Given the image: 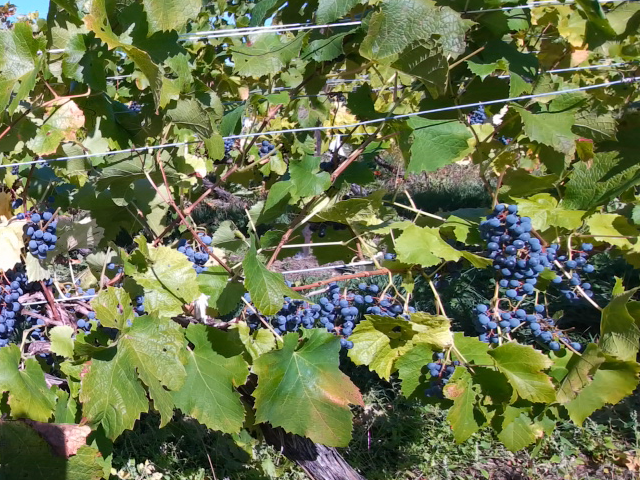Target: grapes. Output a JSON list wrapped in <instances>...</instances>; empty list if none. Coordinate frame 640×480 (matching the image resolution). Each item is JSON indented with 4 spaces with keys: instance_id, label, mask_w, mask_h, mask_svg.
Here are the masks:
<instances>
[{
    "instance_id": "16",
    "label": "grapes",
    "mask_w": 640,
    "mask_h": 480,
    "mask_svg": "<svg viewBox=\"0 0 640 480\" xmlns=\"http://www.w3.org/2000/svg\"><path fill=\"white\" fill-rule=\"evenodd\" d=\"M246 312L248 313V316H249L250 328L251 329L257 328L258 324L260 323V319L257 318V316L254 314V312L250 308H247Z\"/></svg>"
},
{
    "instance_id": "12",
    "label": "grapes",
    "mask_w": 640,
    "mask_h": 480,
    "mask_svg": "<svg viewBox=\"0 0 640 480\" xmlns=\"http://www.w3.org/2000/svg\"><path fill=\"white\" fill-rule=\"evenodd\" d=\"M54 214V209L53 208H48L44 213H42L41 215L38 212H34L32 213L31 210H28L27 215L30 217V220L33 223H39L41 219H43L44 222H48L51 217Z\"/></svg>"
},
{
    "instance_id": "18",
    "label": "grapes",
    "mask_w": 640,
    "mask_h": 480,
    "mask_svg": "<svg viewBox=\"0 0 640 480\" xmlns=\"http://www.w3.org/2000/svg\"><path fill=\"white\" fill-rule=\"evenodd\" d=\"M32 337H37L38 340H40L42 342H47L48 341V337H46L45 335L41 334V328H35V331H32Z\"/></svg>"
},
{
    "instance_id": "17",
    "label": "grapes",
    "mask_w": 640,
    "mask_h": 480,
    "mask_svg": "<svg viewBox=\"0 0 640 480\" xmlns=\"http://www.w3.org/2000/svg\"><path fill=\"white\" fill-rule=\"evenodd\" d=\"M38 358L47 359V361H46L47 365H53L54 364V357H52V354H50V353L39 352Z\"/></svg>"
},
{
    "instance_id": "4",
    "label": "grapes",
    "mask_w": 640,
    "mask_h": 480,
    "mask_svg": "<svg viewBox=\"0 0 640 480\" xmlns=\"http://www.w3.org/2000/svg\"><path fill=\"white\" fill-rule=\"evenodd\" d=\"M8 276L12 281L11 285L5 284L4 291L3 287L0 286V303L5 301V305L0 307V347H5L9 342L7 335L14 331L13 326L17 323L15 313L22 309L21 302H17L19 297L24 295V290L20 287V283L29 284V278L20 265L15 266V271L9 269Z\"/></svg>"
},
{
    "instance_id": "9",
    "label": "grapes",
    "mask_w": 640,
    "mask_h": 480,
    "mask_svg": "<svg viewBox=\"0 0 640 480\" xmlns=\"http://www.w3.org/2000/svg\"><path fill=\"white\" fill-rule=\"evenodd\" d=\"M358 289L360 291H366L368 290L371 294H360V295H356L355 293H349L347 295L348 299L354 298V302L356 304H360V305H364L365 303L371 304L375 302V299L373 298L372 294H376L379 292L380 290V286L378 284H370L367 285L366 283H360L358 285Z\"/></svg>"
},
{
    "instance_id": "1",
    "label": "grapes",
    "mask_w": 640,
    "mask_h": 480,
    "mask_svg": "<svg viewBox=\"0 0 640 480\" xmlns=\"http://www.w3.org/2000/svg\"><path fill=\"white\" fill-rule=\"evenodd\" d=\"M505 206L498 204L495 206L493 214L487 216V220L479 224L482 230L480 237L487 239V257L495 259L493 269L500 271L504 277L499 281L501 288L519 287L521 281L526 277L522 286V292L527 295L534 294V286L538 282L539 275L544 268L553 269L554 261L565 262V255H558L560 249L559 244L548 246L545 251L544 246L540 244V240L531 237L530 230L533 229L530 217L518 216L519 207L510 204L507 207V213L504 217L506 229L513 232L512 245H507L505 249L500 242H506L511 239L509 234H505V228L501 224V216Z\"/></svg>"
},
{
    "instance_id": "14",
    "label": "grapes",
    "mask_w": 640,
    "mask_h": 480,
    "mask_svg": "<svg viewBox=\"0 0 640 480\" xmlns=\"http://www.w3.org/2000/svg\"><path fill=\"white\" fill-rule=\"evenodd\" d=\"M273 149H274V145L270 144L267 140H264L262 142V147L258 151V156L264 157L265 155L269 154L270 151H272Z\"/></svg>"
},
{
    "instance_id": "2",
    "label": "grapes",
    "mask_w": 640,
    "mask_h": 480,
    "mask_svg": "<svg viewBox=\"0 0 640 480\" xmlns=\"http://www.w3.org/2000/svg\"><path fill=\"white\" fill-rule=\"evenodd\" d=\"M328 292L330 293V301L327 297H321L319 303H313L309 306L306 299L292 300L290 295L284 297L286 303L282 305L276 318L271 320V324L275 327L274 331L281 335L283 331H299L301 329V323L307 330H311L319 319L320 323L326 327L328 331H333L336 328L334 320L337 315L334 313L336 306L341 308V315L343 321L340 324L339 334L341 336L351 335L355 328L354 316L359 314V309L354 305H349V301L346 298H339L341 293V287L336 283L328 285Z\"/></svg>"
},
{
    "instance_id": "6",
    "label": "grapes",
    "mask_w": 640,
    "mask_h": 480,
    "mask_svg": "<svg viewBox=\"0 0 640 480\" xmlns=\"http://www.w3.org/2000/svg\"><path fill=\"white\" fill-rule=\"evenodd\" d=\"M177 251L184 253L190 262H193L192 268L195 270V276L199 277L203 271H207L208 267L203 266L209 260V253L204 247H200L199 251H193V248L188 245L187 239H181L178 243Z\"/></svg>"
},
{
    "instance_id": "10",
    "label": "grapes",
    "mask_w": 640,
    "mask_h": 480,
    "mask_svg": "<svg viewBox=\"0 0 640 480\" xmlns=\"http://www.w3.org/2000/svg\"><path fill=\"white\" fill-rule=\"evenodd\" d=\"M586 258L587 255L585 253H579L575 259H569L566 262V268L569 271H576L578 268H581L583 272L593 273L595 267L592 264H588Z\"/></svg>"
},
{
    "instance_id": "11",
    "label": "grapes",
    "mask_w": 640,
    "mask_h": 480,
    "mask_svg": "<svg viewBox=\"0 0 640 480\" xmlns=\"http://www.w3.org/2000/svg\"><path fill=\"white\" fill-rule=\"evenodd\" d=\"M569 282L576 286V285H581V288L584 290V293L586 295H588L590 298H592L594 296V292L591 290L592 285L589 282H583L581 281V275L578 272H574L571 275V278L569 279Z\"/></svg>"
},
{
    "instance_id": "19",
    "label": "grapes",
    "mask_w": 640,
    "mask_h": 480,
    "mask_svg": "<svg viewBox=\"0 0 640 480\" xmlns=\"http://www.w3.org/2000/svg\"><path fill=\"white\" fill-rule=\"evenodd\" d=\"M27 322H32V327H35V325H45V322L34 317H28Z\"/></svg>"
},
{
    "instance_id": "15",
    "label": "grapes",
    "mask_w": 640,
    "mask_h": 480,
    "mask_svg": "<svg viewBox=\"0 0 640 480\" xmlns=\"http://www.w3.org/2000/svg\"><path fill=\"white\" fill-rule=\"evenodd\" d=\"M135 302L138 303L136 306V311L134 312V316L138 317L139 316V312H144L145 311V305L143 304L145 302V297L142 295H137L135 297Z\"/></svg>"
},
{
    "instance_id": "13",
    "label": "grapes",
    "mask_w": 640,
    "mask_h": 480,
    "mask_svg": "<svg viewBox=\"0 0 640 480\" xmlns=\"http://www.w3.org/2000/svg\"><path fill=\"white\" fill-rule=\"evenodd\" d=\"M75 285H76V286H78V287H77V292H78L79 294H84V295H85V298H84V299H82L81 301H87V300L92 299V296L95 294V290H94L93 288H89V289L86 291V293H84V290H83V289H82V287L80 286V285H81V280H80V279H77V281L75 282Z\"/></svg>"
},
{
    "instance_id": "3",
    "label": "grapes",
    "mask_w": 640,
    "mask_h": 480,
    "mask_svg": "<svg viewBox=\"0 0 640 480\" xmlns=\"http://www.w3.org/2000/svg\"><path fill=\"white\" fill-rule=\"evenodd\" d=\"M490 305L488 303H478L475 306V310L478 313L472 318V323L475 325V330L479 333L478 340L482 343H491L497 344L499 342L498 335L493 333L491 336L488 335L489 330H495L498 325L502 329H506V333H511V328H516L520 325V322H528V326L530 329V334L535 337H539V339L543 343H549V348L552 351H559L561 349V344L554 340V334L556 336L562 337V340L567 343L571 348L575 351H579L582 348V345L578 341H572L570 338L565 337L562 331L558 330H542L541 324L537 321V317L542 318L547 324L551 326H555V321L546 317L545 305L543 303L536 304L534 306L535 315L527 314L525 309H517L516 311H499L497 316L501 318L498 323L493 321V318L488 315V309Z\"/></svg>"
},
{
    "instance_id": "8",
    "label": "grapes",
    "mask_w": 640,
    "mask_h": 480,
    "mask_svg": "<svg viewBox=\"0 0 640 480\" xmlns=\"http://www.w3.org/2000/svg\"><path fill=\"white\" fill-rule=\"evenodd\" d=\"M459 365H460L459 361H454L451 363V365H447L445 367V371L447 372L445 375V378H442L439 384L435 381H431L429 384V388H427L424 391L425 397L433 398L436 395L437 398L443 399L444 394L442 393L441 388H443L444 385L450 381V377L454 375V372L456 371L457 366Z\"/></svg>"
},
{
    "instance_id": "5",
    "label": "grapes",
    "mask_w": 640,
    "mask_h": 480,
    "mask_svg": "<svg viewBox=\"0 0 640 480\" xmlns=\"http://www.w3.org/2000/svg\"><path fill=\"white\" fill-rule=\"evenodd\" d=\"M56 230L57 223L54 220L49 222V228L45 231L28 226L25 236L30 237L28 244L31 254L37 255L38 259H46L47 252L56 248L55 243L58 241V235L55 234Z\"/></svg>"
},
{
    "instance_id": "7",
    "label": "grapes",
    "mask_w": 640,
    "mask_h": 480,
    "mask_svg": "<svg viewBox=\"0 0 640 480\" xmlns=\"http://www.w3.org/2000/svg\"><path fill=\"white\" fill-rule=\"evenodd\" d=\"M393 299V295L390 292H387L384 295V300L380 301V305L368 306L365 309V312L368 314L378 315L379 317H385L389 315L390 317H398L399 315L405 319L410 320L411 316L404 312V308L401 305H395L391 303Z\"/></svg>"
}]
</instances>
